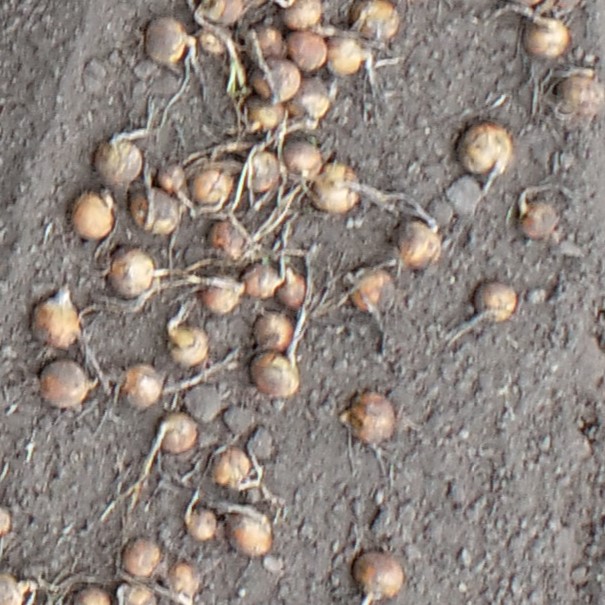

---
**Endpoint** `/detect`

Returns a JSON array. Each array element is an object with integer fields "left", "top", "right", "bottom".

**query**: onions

[
  {"left": 37, "top": 359, "right": 92, "bottom": 408},
  {"left": 95, "top": 142, "right": 141, "bottom": 185},
  {"left": 167, "top": 563, "right": 197, "bottom": 596},
  {"left": 207, "top": 219, "right": 246, "bottom": 258},
  {"left": 352, "top": 552, "right": 404, "bottom": 595},
  {"left": 119, "top": 363, "right": 163, "bottom": 407},
  {"left": 243, "top": 151, "right": 280, "bottom": 191},
  {"left": 120, "top": 536, "right": 162, "bottom": 578},
  {"left": 73, "top": 584, "right": 114, "bottom": 604},
  {"left": 343, "top": 391, "right": 393, "bottom": 444},
  {"left": 558, "top": 69, "right": 602, "bottom": 114},
  {"left": 169, "top": 322, "right": 209, "bottom": 368},
  {"left": 141, "top": 19, "right": 190, "bottom": 65},
  {"left": 210, "top": 447, "right": 251, "bottom": 487},
  {"left": 250, "top": 61, "right": 301, "bottom": 103},
  {"left": 455, "top": 124, "right": 509, "bottom": 174},
  {"left": 186, "top": 166, "right": 232, "bottom": 206},
  {"left": 348, "top": 269, "right": 392, "bottom": 311},
  {"left": 253, "top": 26, "right": 283, "bottom": 58},
  {"left": 523, "top": 17, "right": 569, "bottom": 58},
  {"left": 286, "top": 31, "right": 326, "bottom": 70},
  {"left": 186, "top": 508, "right": 216, "bottom": 539},
  {"left": 107, "top": 249, "right": 155, "bottom": 298},
  {"left": 248, "top": 97, "right": 284, "bottom": 132},
  {"left": 294, "top": 79, "right": 331, "bottom": 117},
  {"left": 283, "top": 0, "right": 320, "bottom": 33},
  {"left": 131, "top": 188, "right": 181, "bottom": 234},
  {"left": 198, "top": 279, "right": 241, "bottom": 314},
  {"left": 352, "top": 0, "right": 399, "bottom": 43},
  {"left": 311, "top": 166, "right": 356, "bottom": 211},
  {"left": 274, "top": 270, "right": 304, "bottom": 306},
  {"left": 242, "top": 265, "right": 282, "bottom": 298},
  {"left": 395, "top": 222, "right": 441, "bottom": 266},
  {"left": 120, "top": 580, "right": 154, "bottom": 604},
  {"left": 516, "top": 198, "right": 558, "bottom": 238},
  {"left": 31, "top": 293, "right": 80, "bottom": 348},
  {"left": 472, "top": 280, "right": 517, "bottom": 321},
  {"left": 283, "top": 139, "right": 320, "bottom": 176},
  {"left": 156, "top": 163, "right": 186, "bottom": 194},
  {"left": 249, "top": 351, "right": 298, "bottom": 397},
  {"left": 0, "top": 574, "right": 25, "bottom": 604},
  {"left": 224, "top": 511, "right": 271, "bottom": 555},
  {"left": 157, "top": 415, "right": 197, "bottom": 454},
  {"left": 0, "top": 506, "right": 13, "bottom": 540},
  {"left": 212, "top": 0, "right": 244, "bottom": 24},
  {"left": 326, "top": 36, "right": 363, "bottom": 76},
  {"left": 69, "top": 192, "right": 112, "bottom": 237},
  {"left": 198, "top": 28, "right": 229, "bottom": 55},
  {"left": 253, "top": 311, "right": 292, "bottom": 348}
]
